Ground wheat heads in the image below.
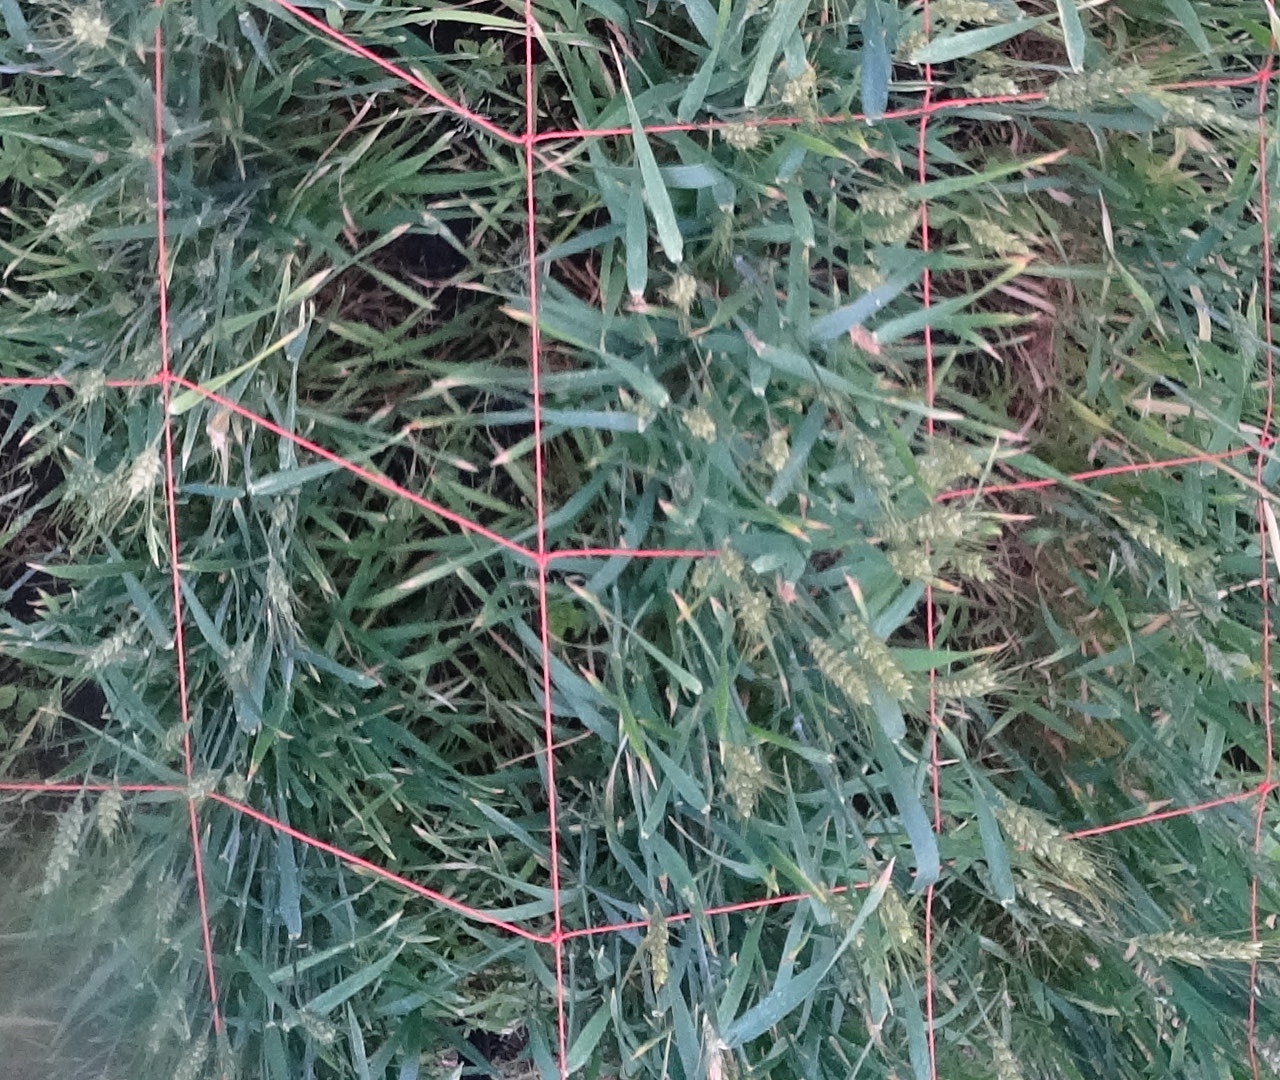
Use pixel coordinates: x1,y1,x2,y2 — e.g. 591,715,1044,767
827,892,884,979
175,1038,215,1078
726,592,775,632
925,669,994,704
701,1021,730,1080
967,212,1028,249
718,548,746,579
924,0,1000,30
159,711,194,747
81,626,130,671
1131,930,1257,971
966,73,1022,102
721,737,760,814
121,138,154,155
78,368,111,400
1123,517,1188,570
859,186,907,223
32,291,75,312
1204,634,1230,687
1142,83,1247,130
777,72,814,99
846,611,912,706
885,549,941,585
880,502,963,541
67,448,100,497
54,204,87,230
138,978,190,1051
939,546,996,584
984,1026,1026,1080
865,849,919,950
91,471,126,529
812,625,861,700
644,911,675,982
67,14,111,47
46,793,82,892
266,555,288,617
1011,866,1093,922
94,786,124,835
77,861,146,930
826,412,892,505
694,552,713,592
128,444,163,496
25,428,68,464
677,405,719,446
718,117,762,151
850,260,883,297
1052,61,1140,113
858,218,924,247
917,439,976,485
664,272,695,310
994,798,1096,875
759,430,796,470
